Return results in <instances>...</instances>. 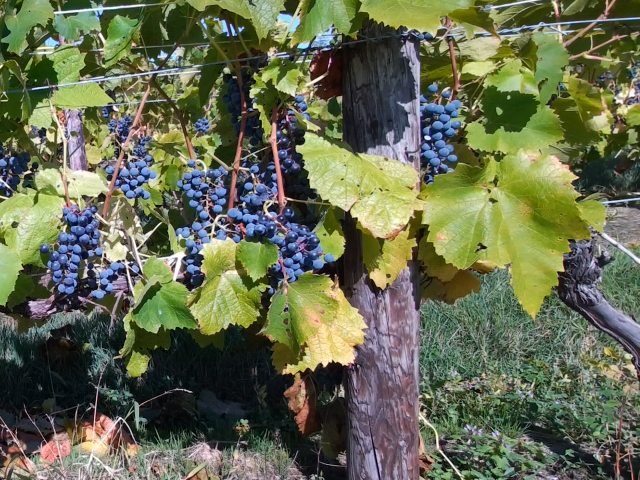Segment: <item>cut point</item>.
Instances as JSON below:
<instances>
[{"label":"cut point","instance_id":"cut-point-1","mask_svg":"<svg viewBox=\"0 0 640 480\" xmlns=\"http://www.w3.org/2000/svg\"><path fill=\"white\" fill-rule=\"evenodd\" d=\"M65 179L70 183V185L72 186V188H73V190L75 191L76 195H77V196H80V192H79V190L77 189V187H76V185L74 184V182L72 181V179H71L69 176H67V175H65Z\"/></svg>","mask_w":640,"mask_h":480},{"label":"cut point","instance_id":"cut-point-2","mask_svg":"<svg viewBox=\"0 0 640 480\" xmlns=\"http://www.w3.org/2000/svg\"><path fill=\"white\" fill-rule=\"evenodd\" d=\"M219 218H227V215H223V214L216 215L215 219L213 221L212 230H215L216 224H217Z\"/></svg>","mask_w":640,"mask_h":480}]
</instances>
